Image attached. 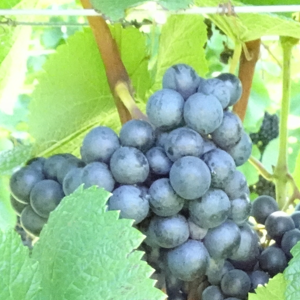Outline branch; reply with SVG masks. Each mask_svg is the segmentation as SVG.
I'll use <instances>...</instances> for the list:
<instances>
[{
  "label": "branch",
  "instance_id": "30e6481e",
  "mask_svg": "<svg viewBox=\"0 0 300 300\" xmlns=\"http://www.w3.org/2000/svg\"><path fill=\"white\" fill-rule=\"evenodd\" d=\"M87 20L89 21L90 28L94 30L97 39V46L105 66L110 93L115 100V106L120 115V123L124 124L132 119V114L115 92V84L117 80L125 82L131 95H133L129 74L121 61V52L118 48V44L112 38L103 18L101 16H88Z\"/></svg>",
  "mask_w": 300,
  "mask_h": 300
},
{
  "label": "branch",
  "instance_id": "325d2c04",
  "mask_svg": "<svg viewBox=\"0 0 300 300\" xmlns=\"http://www.w3.org/2000/svg\"><path fill=\"white\" fill-rule=\"evenodd\" d=\"M259 52L260 39L258 37H253L250 41L242 44L238 78L243 83L244 93L242 98L232 106V111L237 113L241 117L242 121L245 118L247 106L252 95V84Z\"/></svg>",
  "mask_w": 300,
  "mask_h": 300
}]
</instances>
